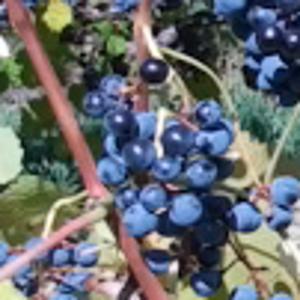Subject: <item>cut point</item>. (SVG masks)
<instances>
[{"label": "cut point", "mask_w": 300, "mask_h": 300, "mask_svg": "<svg viewBox=\"0 0 300 300\" xmlns=\"http://www.w3.org/2000/svg\"><path fill=\"white\" fill-rule=\"evenodd\" d=\"M86 195H88L86 193V190H83V191L78 192L74 197L56 199L47 210L42 235L46 236L48 234V232L51 230L53 221H54V219L57 215V212L60 209L62 203H74V202L78 201L81 197L86 196Z\"/></svg>", "instance_id": "1"}, {"label": "cut point", "mask_w": 300, "mask_h": 300, "mask_svg": "<svg viewBox=\"0 0 300 300\" xmlns=\"http://www.w3.org/2000/svg\"><path fill=\"white\" fill-rule=\"evenodd\" d=\"M145 36L147 38V43L149 45L148 50L150 51V53L157 59H161L163 57V54L161 53L157 44L155 43L154 35L150 30V27H145Z\"/></svg>", "instance_id": "2"}]
</instances>
